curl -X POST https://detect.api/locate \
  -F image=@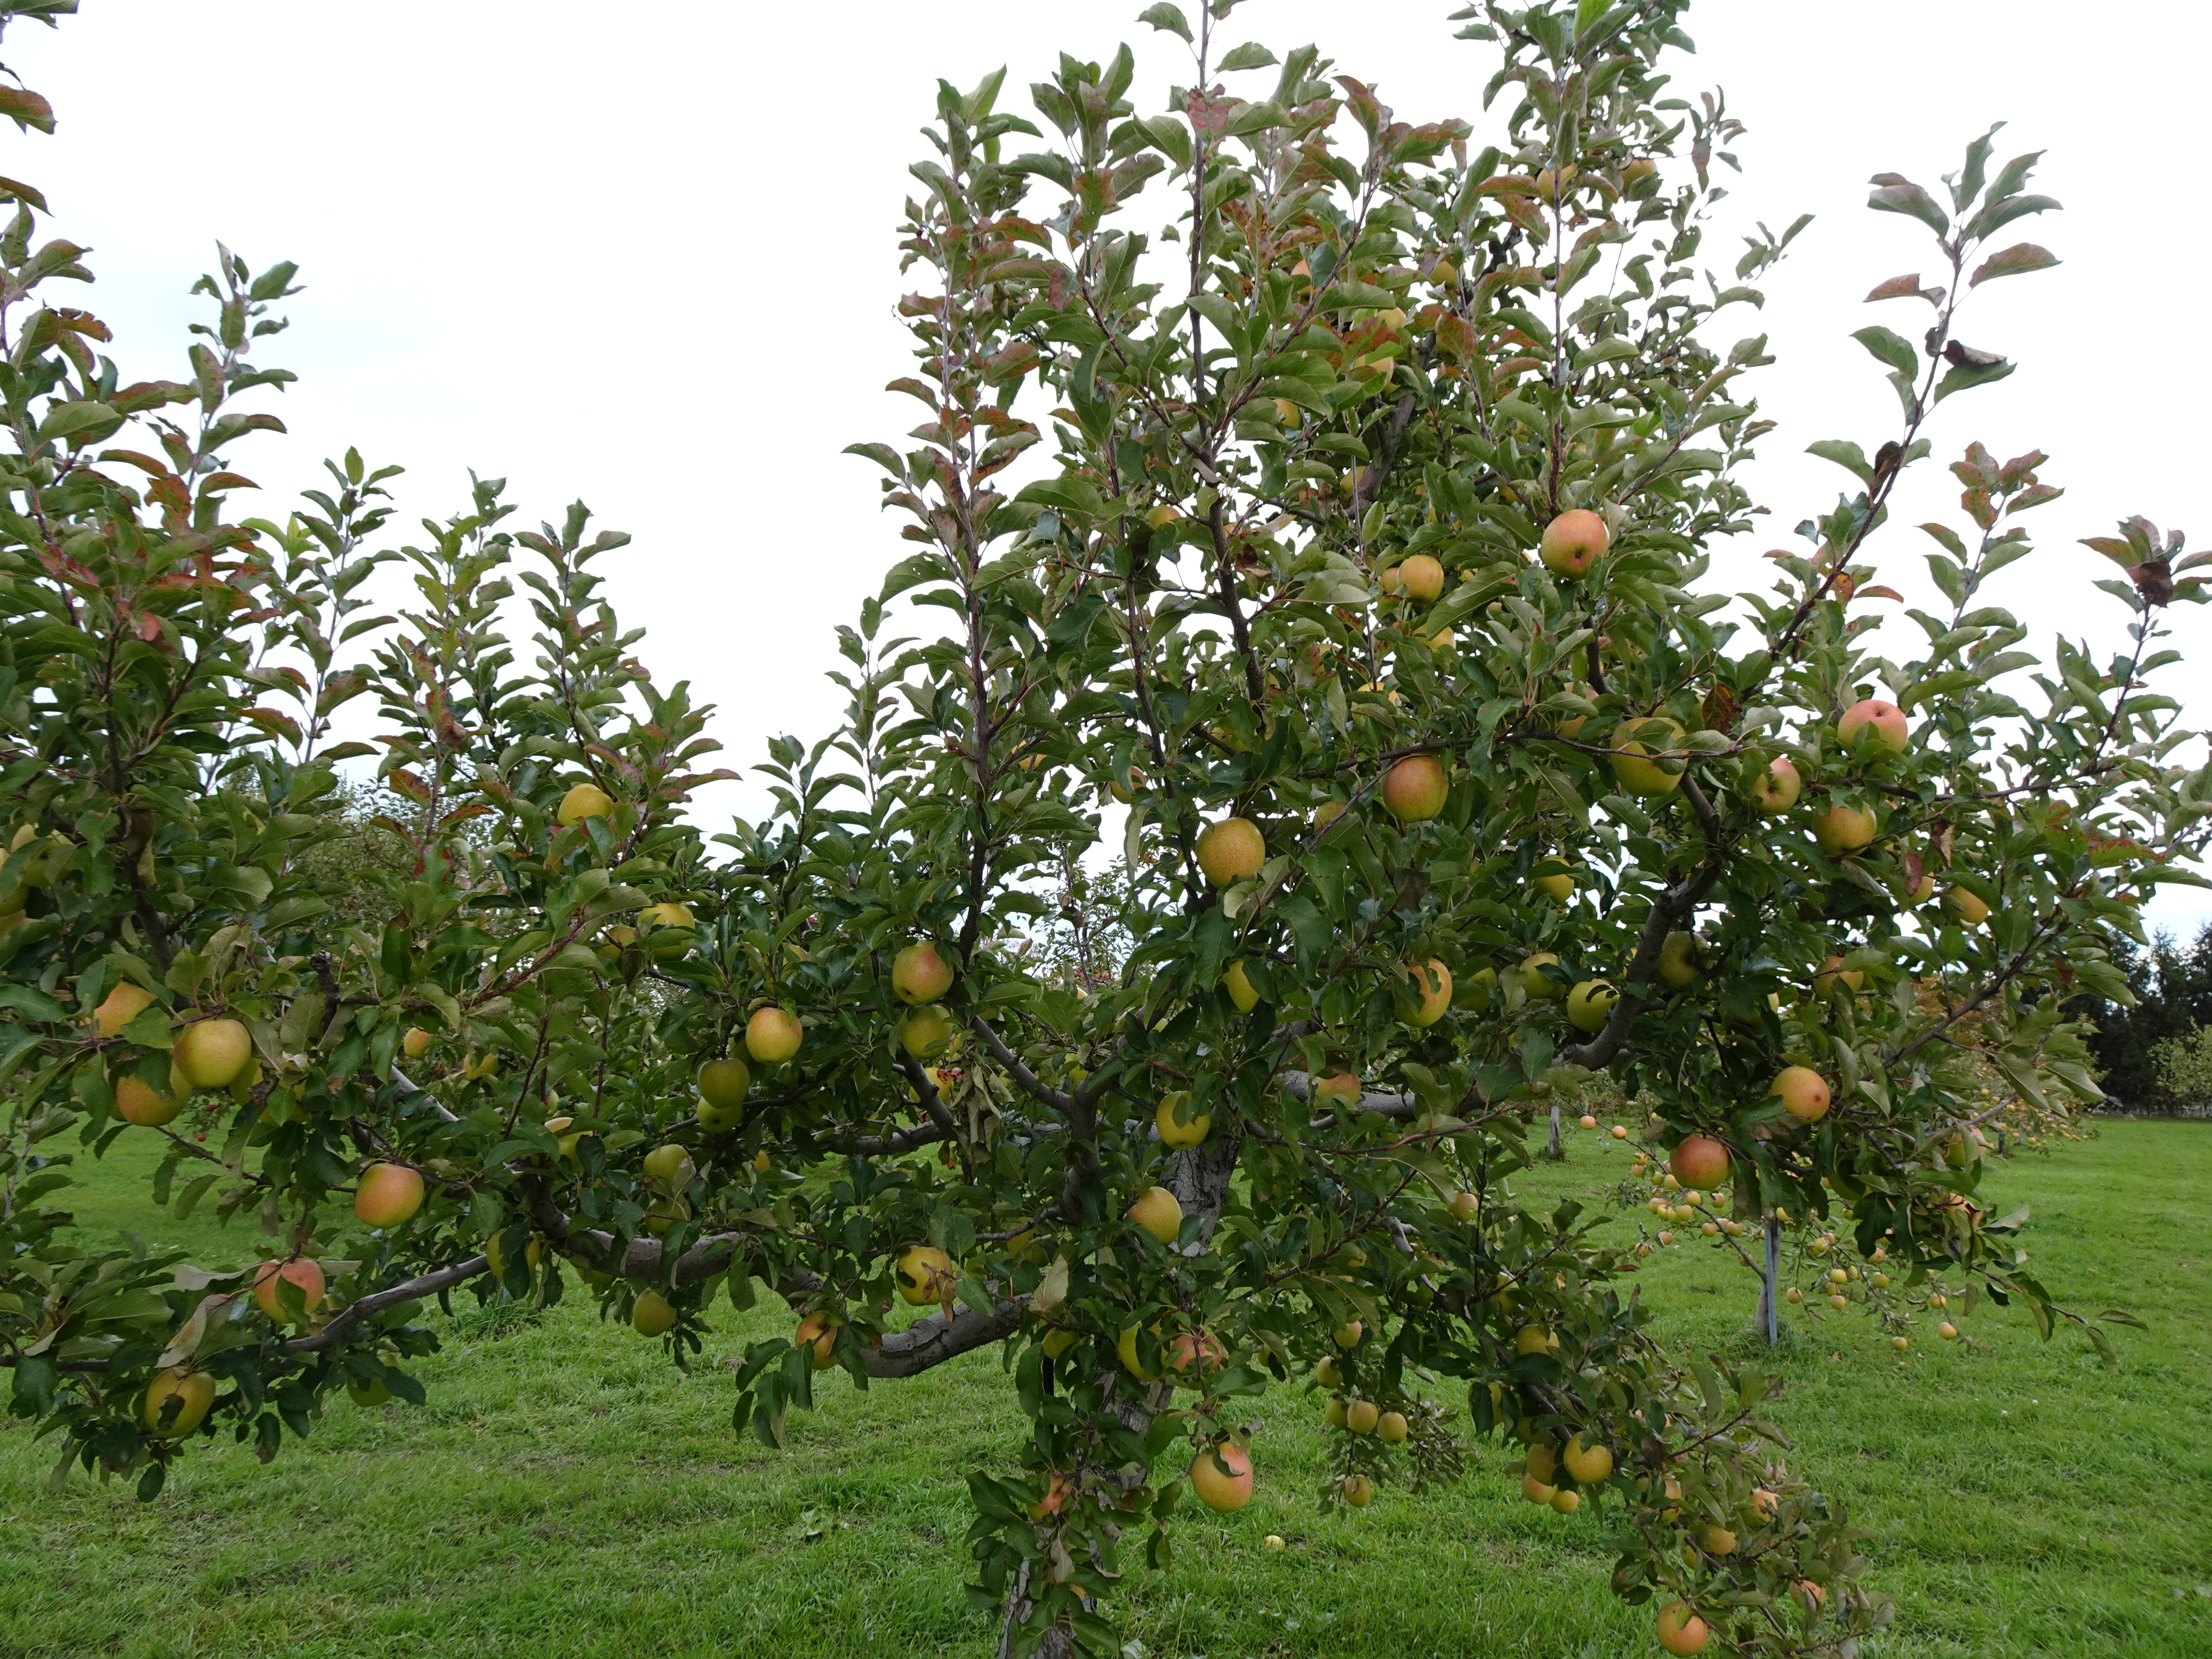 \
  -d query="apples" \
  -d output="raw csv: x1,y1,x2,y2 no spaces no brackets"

1345,1399,1377,1437
1442,1190,1478,1226
807,916,817,926
1161,664,1186,686
1812,954,1865,1008
1542,1266,1591,1311
1744,1488,1782,1531
1332,259,1378,303
1864,799,1899,829
408,834,453,873
1168,1332,1223,1375
1536,159,1580,211
1578,651,1606,680
1543,438,1593,476
1339,1247,1368,1272
793,1309,849,1370
11,818,87,903
731,1145,772,1190
1640,1479,1683,1523
1418,245,1465,285
1538,507,1610,582
528,1086,561,1119
1457,559,1486,585
1409,1248,1440,1283
1732,756,1802,817
909,1066,962,1111
460,1043,510,1081
1766,1065,1831,1128
1615,156,1659,198
1496,470,1530,506
1028,1471,1081,1529
1120,1185,1183,1248
0,845,32,920
1245,670,1286,707
1326,1397,1350,1429
1150,1089,1213,1154
600,924,638,969
998,1067,1030,1097
1410,413,1453,454
1307,1068,1361,1112
1656,1600,1711,1658
347,1349,400,1409
404,1025,440,1060
1518,952,1574,1000
1302,642,1350,681
1860,837,1896,880
1008,731,1051,774
1210,723,1251,760
1290,255,1340,311
1454,856,1481,887
697,1054,752,1110
197,1131,207,1143
644,1192,687,1245
544,844,580,880
1107,759,1147,805
1567,979,1621,1033
995,1212,1041,1264
1467,1381,1503,1412
118,1056,196,1127
1812,790,1878,859
1333,1314,1362,1349
1745,983,1781,1018
345,896,359,909
1311,801,1354,844
769,944,811,983
230,1056,308,1109
1050,1049,1091,1096
1521,1470,1557,1506
1528,857,1576,905
1376,565,1413,607
1478,1268,1522,1318
1272,1021,1289,1042
1140,506,1183,550
1350,681,1404,739
1548,1488,1579,1516
1607,945,1645,989
1259,1342,1292,1370
1396,552,1447,607
1647,927,1713,996
895,1001,954,1063
485,1224,541,1286
1435,322,1472,357
1386,951,1454,1030
534,1116,597,1179
1687,1515,1742,1557
1206,956,1265,1018
1888,855,1935,906
353,1163,425,1229
1950,1125,1988,1164
1502,1302,1530,1332
1061,1584,1087,1607
1045,1558,1076,1588
1517,1321,1561,1368
1508,412,1542,442
1194,816,1266,891
1442,953,1498,1015
895,1243,957,1309
1661,1448,1690,1475
1112,1006,1173,1056
541,812,584,853
697,1089,744,1136
1383,752,1451,827
1526,1440,1568,1487
632,1283,681,1335
1934,1192,1980,1233
889,936,953,1009
1427,503,1457,530
1338,462,1378,503
1369,306,1410,344
1315,1274,1355,1313
852,1108,894,1146
1663,684,1713,727
1789,1575,1828,1612
1061,984,1092,1020
1632,1406,1672,1439
1264,394,1302,438
1671,1134,1729,1191
745,1007,804,1067
1596,1368,1629,1405
169,1015,252,1091
1940,877,1990,934
1118,1319,1174,1383
1548,681,1605,750
1341,1476,1373,1507
252,1256,325,1325
838,931,852,947
1316,1354,1347,1391
1836,700,1910,768
1042,1323,1084,1364
558,782,615,841
75,975,170,1050
1562,1430,1615,1485
948,1038,976,1069
634,899,696,964
1609,716,1691,797
644,1143,698,1197
1407,620,1458,668
421,1157,467,1197
1190,1442,1255,1514
202,1100,220,1118
1217,522,1255,563
144,1365,216,1438
1336,338,1396,402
